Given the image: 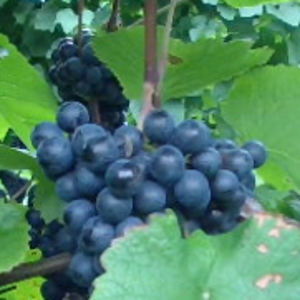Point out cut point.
<instances>
[{"mask_svg":"<svg viewBox=\"0 0 300 300\" xmlns=\"http://www.w3.org/2000/svg\"><path fill=\"white\" fill-rule=\"evenodd\" d=\"M143 88V100H142V109L141 115L138 122V127L140 130L144 129L145 118L151 113L154 109L151 102L152 93L154 92V87L150 82H145L142 84Z\"/></svg>","mask_w":300,"mask_h":300,"instance_id":"1","label":"cut point"}]
</instances>
